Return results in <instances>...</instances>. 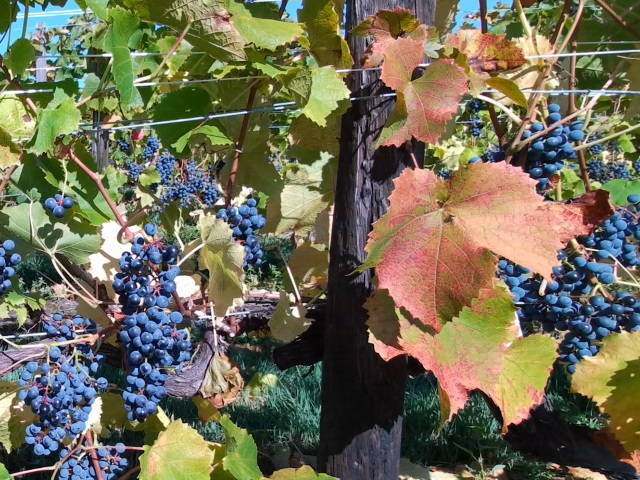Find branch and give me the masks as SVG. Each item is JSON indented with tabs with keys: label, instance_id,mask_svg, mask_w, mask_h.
<instances>
[{
	"label": "branch",
	"instance_id": "branch-4",
	"mask_svg": "<svg viewBox=\"0 0 640 480\" xmlns=\"http://www.w3.org/2000/svg\"><path fill=\"white\" fill-rule=\"evenodd\" d=\"M585 5H586L585 0H580L578 2L575 9L574 19L572 20L564 38L561 40V43L557 48V51L559 53H563L566 50L569 42H570V50L571 51L577 50V40H578L577 26L579 22L582 20V12Z\"/></svg>",
	"mask_w": 640,
	"mask_h": 480
},
{
	"label": "branch",
	"instance_id": "branch-7",
	"mask_svg": "<svg viewBox=\"0 0 640 480\" xmlns=\"http://www.w3.org/2000/svg\"><path fill=\"white\" fill-rule=\"evenodd\" d=\"M558 64V59L557 58H552L551 61L549 62V64L547 65V67L545 68L544 74L542 75V78L540 80V82L538 83V88L539 89H545L546 88V84L552 74L553 69L555 68V66Z\"/></svg>",
	"mask_w": 640,
	"mask_h": 480
},
{
	"label": "branch",
	"instance_id": "branch-10",
	"mask_svg": "<svg viewBox=\"0 0 640 480\" xmlns=\"http://www.w3.org/2000/svg\"><path fill=\"white\" fill-rule=\"evenodd\" d=\"M17 171V167L13 166L7 173V175L4 177L2 183L0 184V193L3 192L4 188L6 187V185L8 184L9 180L11 179V177L13 176V174Z\"/></svg>",
	"mask_w": 640,
	"mask_h": 480
},
{
	"label": "branch",
	"instance_id": "branch-11",
	"mask_svg": "<svg viewBox=\"0 0 640 480\" xmlns=\"http://www.w3.org/2000/svg\"><path fill=\"white\" fill-rule=\"evenodd\" d=\"M173 298L175 300V302L177 303L178 307L181 309V312L184 316L188 315V311L186 309V307L184 306L183 302L181 301V299L179 298V295L177 292L173 293Z\"/></svg>",
	"mask_w": 640,
	"mask_h": 480
},
{
	"label": "branch",
	"instance_id": "branch-3",
	"mask_svg": "<svg viewBox=\"0 0 640 480\" xmlns=\"http://www.w3.org/2000/svg\"><path fill=\"white\" fill-rule=\"evenodd\" d=\"M541 98H542V94H534L533 95V99H532L531 105L528 108V110L524 113L522 124L517 129L516 135L512 139L511 144H510L509 149H508V153L505 156L504 163L506 165H509L511 163V161H512L514 155H515L516 148H517L520 140L522 139V137L524 135V132L528 128V126L530 124V118L535 113Z\"/></svg>",
	"mask_w": 640,
	"mask_h": 480
},
{
	"label": "branch",
	"instance_id": "branch-5",
	"mask_svg": "<svg viewBox=\"0 0 640 480\" xmlns=\"http://www.w3.org/2000/svg\"><path fill=\"white\" fill-rule=\"evenodd\" d=\"M249 120V115H244V118L241 122V130H240V135H239V142L237 145V151L236 154L234 156V164L232 165L231 168V172H230V177H229V182L226 188V192L224 194L223 197V205L227 206L228 205V200L231 194V190L233 188L234 185V179H235V174L237 171V168L239 167V159L241 157L242 154V148H243V144H244V137H245V133H246V125L248 123Z\"/></svg>",
	"mask_w": 640,
	"mask_h": 480
},
{
	"label": "branch",
	"instance_id": "branch-9",
	"mask_svg": "<svg viewBox=\"0 0 640 480\" xmlns=\"http://www.w3.org/2000/svg\"><path fill=\"white\" fill-rule=\"evenodd\" d=\"M0 65H1V67L3 69V73H4L5 77H6V79L8 80V82L11 85H13L17 90L21 89V85L11 77V75H10V73L8 71V66H7V64L5 63V61L3 59H0Z\"/></svg>",
	"mask_w": 640,
	"mask_h": 480
},
{
	"label": "branch",
	"instance_id": "branch-2",
	"mask_svg": "<svg viewBox=\"0 0 640 480\" xmlns=\"http://www.w3.org/2000/svg\"><path fill=\"white\" fill-rule=\"evenodd\" d=\"M117 327H118V323L114 322L110 326L104 329H101L98 333H96L91 338L71 339V340H65V341H60L56 343H41V344H30V345L18 344L17 342H13L12 340H5V343L16 349L33 350V349H43V348H59L60 346L82 344V343H93L97 341L100 337H102L104 334L113 331Z\"/></svg>",
	"mask_w": 640,
	"mask_h": 480
},
{
	"label": "branch",
	"instance_id": "branch-1",
	"mask_svg": "<svg viewBox=\"0 0 640 480\" xmlns=\"http://www.w3.org/2000/svg\"><path fill=\"white\" fill-rule=\"evenodd\" d=\"M57 146L60 148V151L67 155L71 160L75 161L76 164L82 169L84 170L86 173H88L89 176L92 177L93 181L95 182L96 186L99 188L101 194L104 196L106 202L109 204V208L111 210V213L114 217V219L122 226L123 229H125L124 232V236L128 239L129 242H132L135 239V235L133 234V231L131 230V228L124 222V220L122 218H120V216L117 213L116 207L114 205V202L112 201V199L110 198V195L107 193V191L105 190L104 185L100 182L99 178L97 177L96 173L93 172L88 166H86L84 163H82V161L80 160V158L74 154H72V152L70 150H67L65 148V145L62 142H58Z\"/></svg>",
	"mask_w": 640,
	"mask_h": 480
},
{
	"label": "branch",
	"instance_id": "branch-6",
	"mask_svg": "<svg viewBox=\"0 0 640 480\" xmlns=\"http://www.w3.org/2000/svg\"><path fill=\"white\" fill-rule=\"evenodd\" d=\"M578 159H579V163H580V168L582 170V174L584 176L585 179V184H586V188L589 192H592L594 190V185L592 182V176L589 172V168L587 166V161H586V156H585V151L583 149H580L578 151Z\"/></svg>",
	"mask_w": 640,
	"mask_h": 480
},
{
	"label": "branch",
	"instance_id": "branch-8",
	"mask_svg": "<svg viewBox=\"0 0 640 480\" xmlns=\"http://www.w3.org/2000/svg\"><path fill=\"white\" fill-rule=\"evenodd\" d=\"M590 284L592 286H595V288L601 292L603 294V296L609 301V302H614L616 300V297L614 295H612L610 293V290L608 288H606L605 286L602 285V283L597 279V278H593L590 281Z\"/></svg>",
	"mask_w": 640,
	"mask_h": 480
},
{
	"label": "branch",
	"instance_id": "branch-12",
	"mask_svg": "<svg viewBox=\"0 0 640 480\" xmlns=\"http://www.w3.org/2000/svg\"><path fill=\"white\" fill-rule=\"evenodd\" d=\"M256 92H257V87L253 86L252 89H251V92L249 94V100H248L247 109H253L254 97L256 95Z\"/></svg>",
	"mask_w": 640,
	"mask_h": 480
},
{
	"label": "branch",
	"instance_id": "branch-13",
	"mask_svg": "<svg viewBox=\"0 0 640 480\" xmlns=\"http://www.w3.org/2000/svg\"><path fill=\"white\" fill-rule=\"evenodd\" d=\"M22 98L27 103V105L32 109L33 112H37L38 111L37 106L34 103H32V101L30 100V98L27 95L23 94Z\"/></svg>",
	"mask_w": 640,
	"mask_h": 480
}]
</instances>
